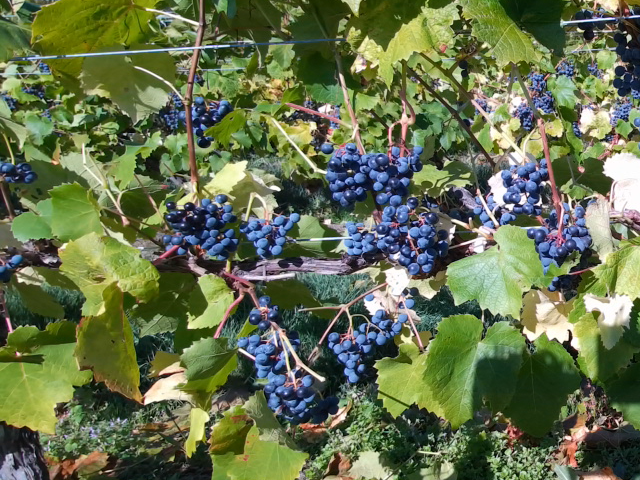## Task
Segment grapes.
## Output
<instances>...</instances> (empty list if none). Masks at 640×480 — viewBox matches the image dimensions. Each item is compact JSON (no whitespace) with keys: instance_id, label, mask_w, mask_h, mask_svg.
Masks as SVG:
<instances>
[{"instance_id":"grapes-6","label":"grapes","mask_w":640,"mask_h":480,"mask_svg":"<svg viewBox=\"0 0 640 480\" xmlns=\"http://www.w3.org/2000/svg\"><path fill=\"white\" fill-rule=\"evenodd\" d=\"M540 170L534 162L515 164L510 169H504L500 173L502 186L506 189L503 201L507 205H514L511 212H503L499 217V223L506 225L517 220L516 215L525 214L538 216L542 209L537 205L540 202L542 181H547L545 159L539 161Z\"/></svg>"},{"instance_id":"grapes-10","label":"grapes","mask_w":640,"mask_h":480,"mask_svg":"<svg viewBox=\"0 0 640 480\" xmlns=\"http://www.w3.org/2000/svg\"><path fill=\"white\" fill-rule=\"evenodd\" d=\"M279 311L280 306L278 304H272L269 307L267 319H264L260 309H250L248 311V323L251 326L257 325V328L261 331H268L271 328L270 321H276L278 319Z\"/></svg>"},{"instance_id":"grapes-2","label":"grapes","mask_w":640,"mask_h":480,"mask_svg":"<svg viewBox=\"0 0 640 480\" xmlns=\"http://www.w3.org/2000/svg\"><path fill=\"white\" fill-rule=\"evenodd\" d=\"M273 337L268 334L267 340ZM237 345L246 348L249 354L255 356L253 366L257 369L255 377L257 379L267 378L269 383L263 387V392L268 397V408L277 411L281 406L283 409L279 416L292 425L307 424L312 420L315 423H322L328 419V413L335 415L338 410L340 399L335 395L327 396L317 402L316 408H307L308 404L316 399L317 391L310 389L315 384L312 374L292 369L296 379H300V386L297 391L292 387H284L287 380L285 373H280L285 368V356L281 350L279 332H274V339L268 343L261 344L259 335L251 334L247 337H239Z\"/></svg>"},{"instance_id":"grapes-5","label":"grapes","mask_w":640,"mask_h":480,"mask_svg":"<svg viewBox=\"0 0 640 480\" xmlns=\"http://www.w3.org/2000/svg\"><path fill=\"white\" fill-rule=\"evenodd\" d=\"M574 213L576 218L573 220V224L565 226L560 231V236L566 240L561 246L555 240H546L549 233L558 229V215L555 209H552L549 217L544 219L546 227L539 230H527V237L536 242L534 248L541 260L543 275L547 274L552 263L556 269H560L568 252L575 250L584 253L587 247L592 244V237L585 226L586 209L582 206H576Z\"/></svg>"},{"instance_id":"grapes-8","label":"grapes","mask_w":640,"mask_h":480,"mask_svg":"<svg viewBox=\"0 0 640 480\" xmlns=\"http://www.w3.org/2000/svg\"><path fill=\"white\" fill-rule=\"evenodd\" d=\"M194 104L195 105L191 107V122L193 125V134H198L199 137L196 140V145L199 148H209L211 146V141H214V138L206 137L203 131L207 130L215 123H218L228 112L233 110V107L227 100H221L218 104L216 102H210L208 104L210 109L206 111V103L203 96H196L194 98Z\"/></svg>"},{"instance_id":"grapes-13","label":"grapes","mask_w":640,"mask_h":480,"mask_svg":"<svg viewBox=\"0 0 640 480\" xmlns=\"http://www.w3.org/2000/svg\"><path fill=\"white\" fill-rule=\"evenodd\" d=\"M287 338L291 343L293 350L298 351L300 349L299 345L301 344L300 334L297 331H290Z\"/></svg>"},{"instance_id":"grapes-3","label":"grapes","mask_w":640,"mask_h":480,"mask_svg":"<svg viewBox=\"0 0 640 480\" xmlns=\"http://www.w3.org/2000/svg\"><path fill=\"white\" fill-rule=\"evenodd\" d=\"M228 196L225 193H218L215 205L210 199H203L200 207H195L194 203L186 202L183 210L169 212L166 221L172 230L180 234L164 235L162 241L168 245L165 251H170L174 246H178L176 254L184 256L187 246L200 245L201 249L207 250L208 257L217 259H228L230 253L238 250L239 239L235 237V230L226 228L223 230V238L217 241L221 234V229L228 224H233L238 217L232 212L234 205L226 203Z\"/></svg>"},{"instance_id":"grapes-4","label":"grapes","mask_w":640,"mask_h":480,"mask_svg":"<svg viewBox=\"0 0 640 480\" xmlns=\"http://www.w3.org/2000/svg\"><path fill=\"white\" fill-rule=\"evenodd\" d=\"M387 312L384 309H378L370 318V322L378 326L383 332L369 331V324L362 322L358 325V330L352 331L354 344L350 340H343L341 344L339 340L341 334L339 332H330L327 335V347L332 349V353L337 356L336 362L343 365L342 373L350 384L357 383L361 379V373L367 370L365 363L356 364L361 360L360 352L363 356H369L375 352L374 343L379 346H385L388 339L401 334L402 323L409 320L408 314H400L397 321L392 319H384Z\"/></svg>"},{"instance_id":"grapes-1","label":"grapes","mask_w":640,"mask_h":480,"mask_svg":"<svg viewBox=\"0 0 640 480\" xmlns=\"http://www.w3.org/2000/svg\"><path fill=\"white\" fill-rule=\"evenodd\" d=\"M323 154L331 156L329 158L326 179L330 181L329 191L331 198L339 202V205L346 211L355 209V202H365L368 198L366 191L383 188L386 192L378 193L374 199L376 204L385 206L381 222L371 226V231L360 233L359 228H364L362 222L348 221L345 229L348 236L344 241L347 247L346 254L350 256L362 255L363 253L376 254L379 250L383 254H397V263L407 267L409 275L431 274L436 268V259L448 255L449 243L445 240L449 238L447 229L437 231L438 241L435 243L436 225L438 215L435 212L421 213L419 221H412L410 228L407 225L397 227L389 226L396 224H406L409 220L408 213L411 209L419 206V199L415 196L403 204V197L409 193L410 178L415 172L423 169L421 158L423 149L421 145L412 147V154L407 157H400V148L392 146L390 156L395 158L393 166L390 165L389 156L386 153L375 152L361 155L354 142H348L344 149L336 148L329 142L320 146ZM407 234L411 239H416V246L425 249L415 257V251L411 248L407 240Z\"/></svg>"},{"instance_id":"grapes-12","label":"grapes","mask_w":640,"mask_h":480,"mask_svg":"<svg viewBox=\"0 0 640 480\" xmlns=\"http://www.w3.org/2000/svg\"><path fill=\"white\" fill-rule=\"evenodd\" d=\"M23 260L24 256L17 254H12L9 258L5 259V265H0V277H5L8 269H16Z\"/></svg>"},{"instance_id":"grapes-7","label":"grapes","mask_w":640,"mask_h":480,"mask_svg":"<svg viewBox=\"0 0 640 480\" xmlns=\"http://www.w3.org/2000/svg\"><path fill=\"white\" fill-rule=\"evenodd\" d=\"M301 221L300 212L290 213L288 218L285 215H277L270 225L265 218L250 219L248 225L239 227V232L246 235V239L251 241V245L256 248V253L261 258H265L268 254L280 256L286 244L287 232H291Z\"/></svg>"},{"instance_id":"grapes-11","label":"grapes","mask_w":640,"mask_h":480,"mask_svg":"<svg viewBox=\"0 0 640 480\" xmlns=\"http://www.w3.org/2000/svg\"><path fill=\"white\" fill-rule=\"evenodd\" d=\"M474 200L476 201L478 206H476V207H474L472 209V213L474 215H479V221L481 222V224L484 227H490L491 229H494L495 225L493 223V220L490 219V216L486 213V209L480 207L482 205V201H481L480 197L479 196H475Z\"/></svg>"},{"instance_id":"grapes-9","label":"grapes","mask_w":640,"mask_h":480,"mask_svg":"<svg viewBox=\"0 0 640 480\" xmlns=\"http://www.w3.org/2000/svg\"><path fill=\"white\" fill-rule=\"evenodd\" d=\"M0 173L6 174L7 183L33 184L38 180V174L32 171V166L27 162H21L15 166L10 162L0 159Z\"/></svg>"}]
</instances>
